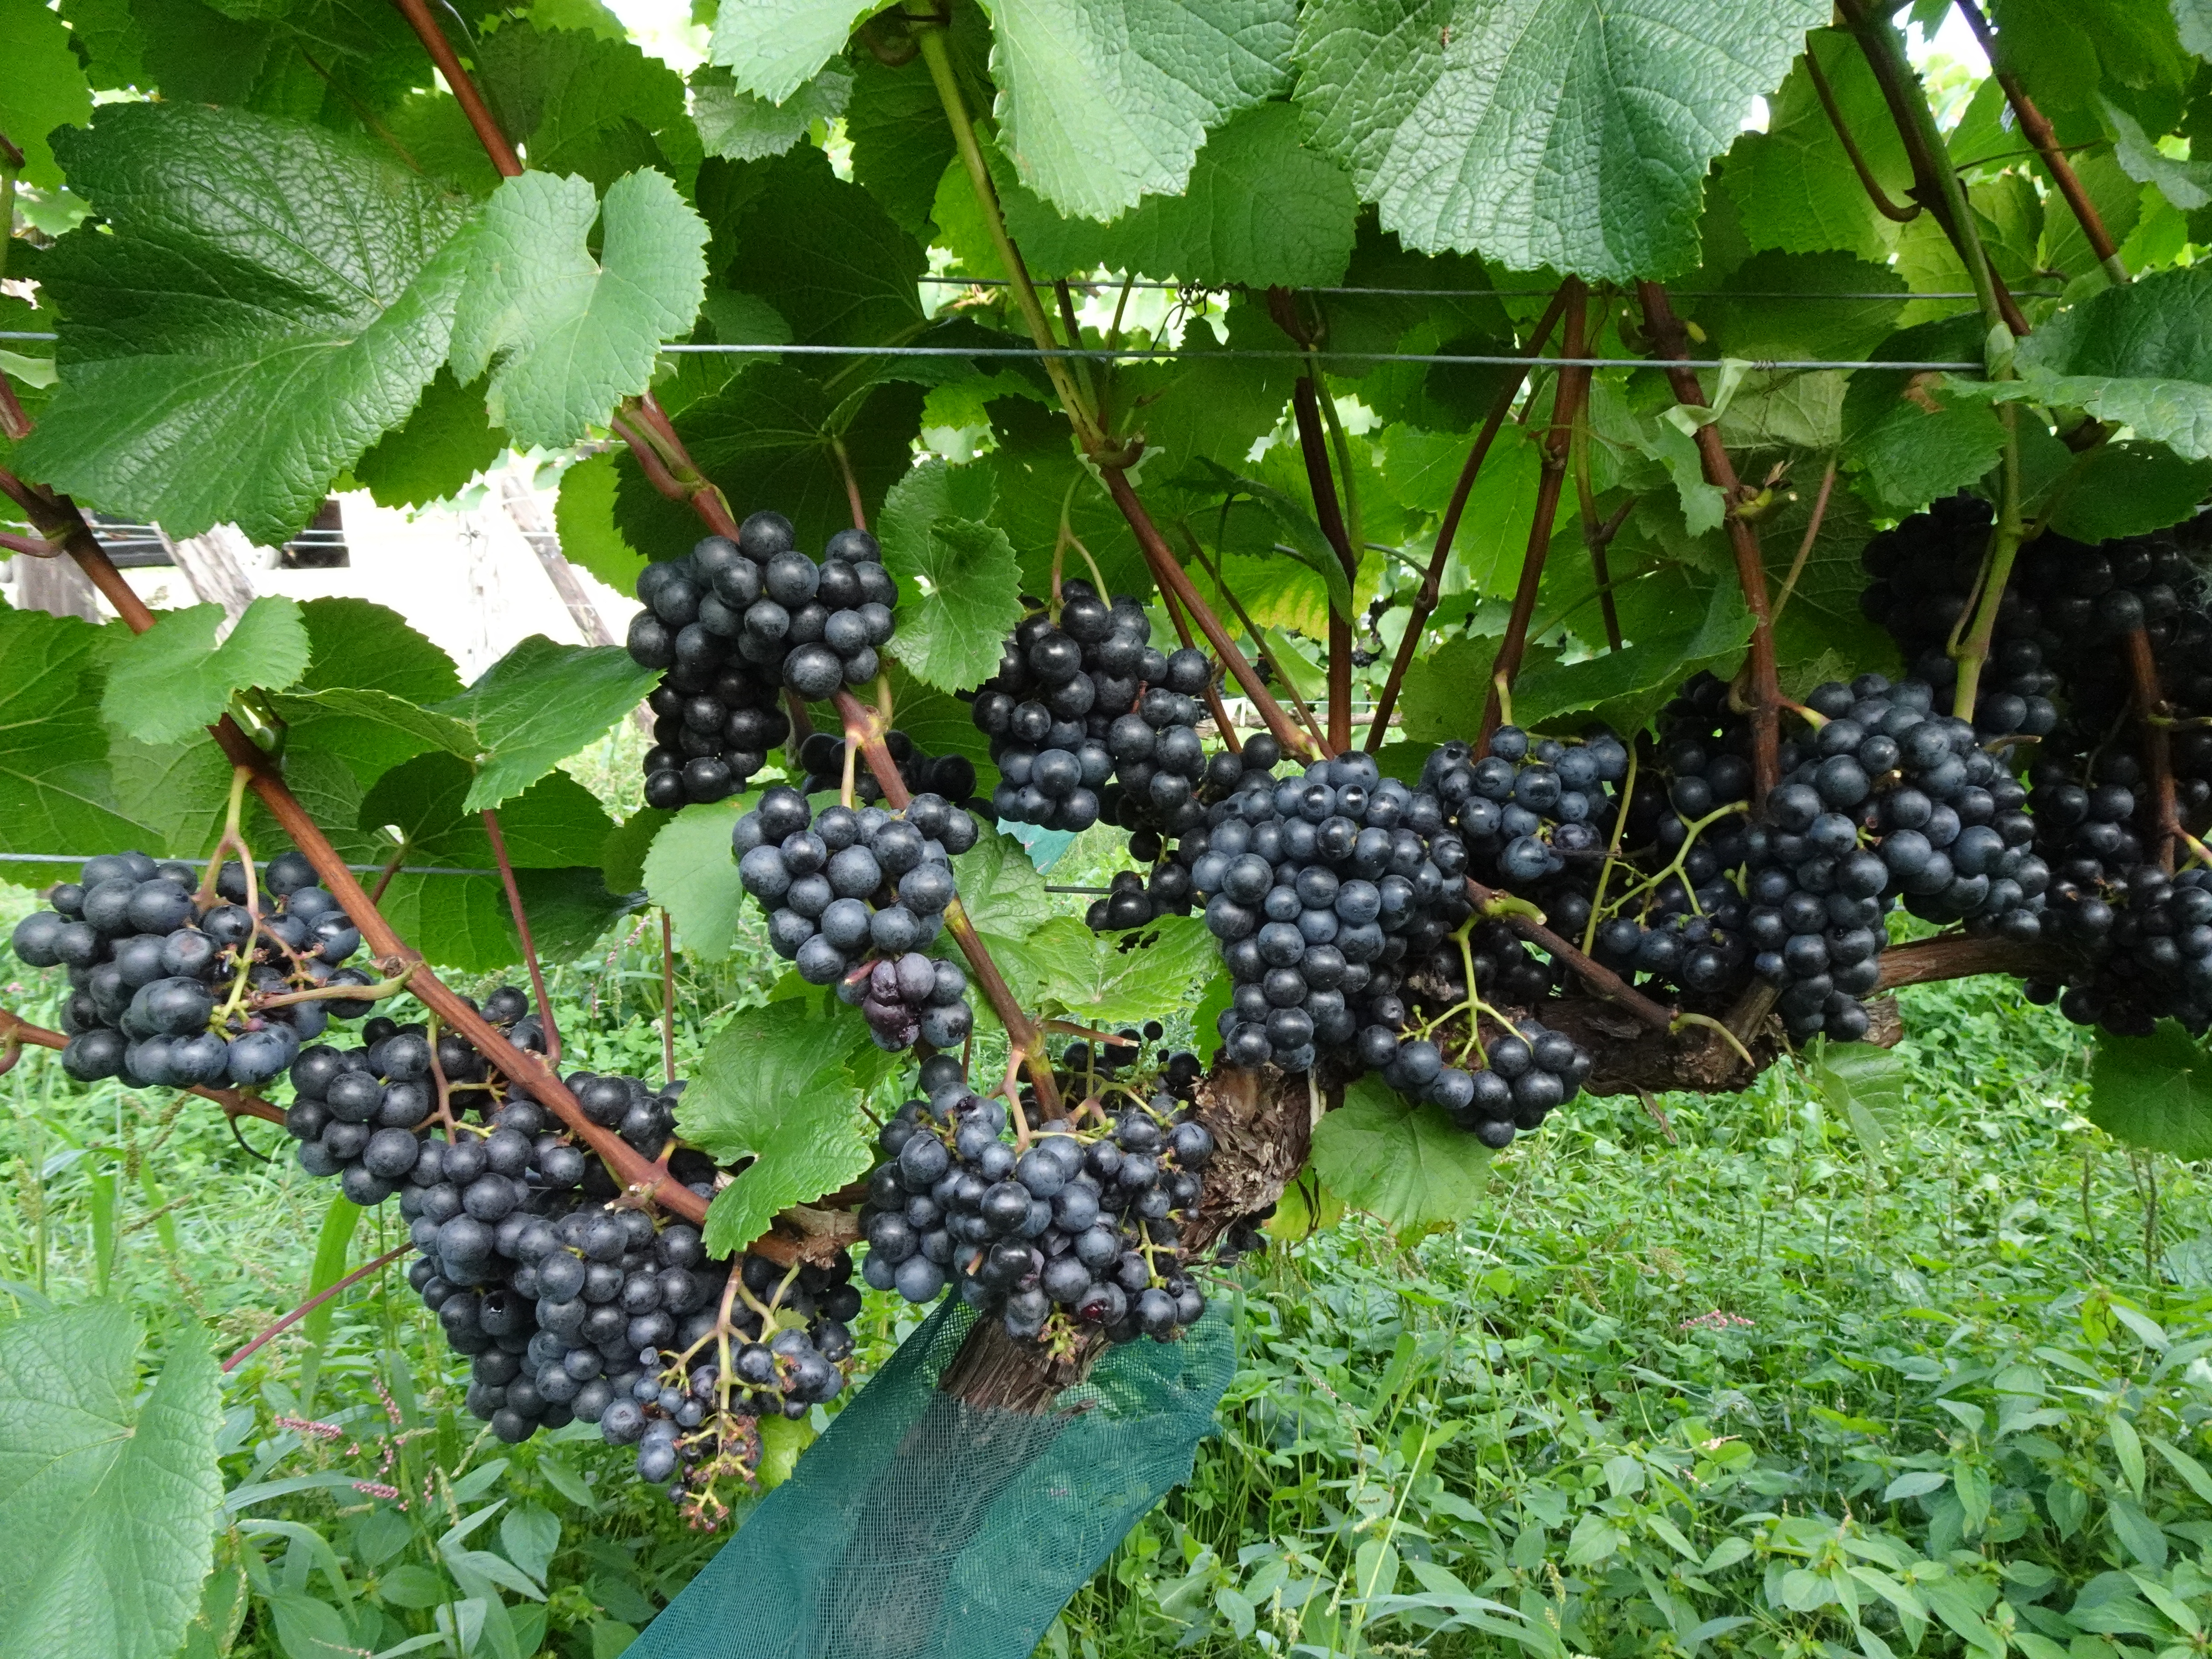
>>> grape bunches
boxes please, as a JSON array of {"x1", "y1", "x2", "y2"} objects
[
  {"x1": 1429, "y1": 899, "x2": 1551, "y2": 1000},
  {"x1": 1778, "y1": 672, "x2": 2049, "y2": 938},
  {"x1": 945, "y1": 1119, "x2": 1129, "y2": 1346},
  {"x1": 862, "y1": 1054, "x2": 1007, "y2": 1299},
  {"x1": 498, "y1": 1188, "x2": 702, "y2": 1425},
  {"x1": 701, "y1": 1210, "x2": 857, "y2": 1359},
  {"x1": 1212, "y1": 1196, "x2": 1277, "y2": 1272},
  {"x1": 1189, "y1": 751, "x2": 1469, "y2": 1075},
  {"x1": 1423, "y1": 727, "x2": 1628, "y2": 880},
  {"x1": 1545, "y1": 742, "x2": 1757, "y2": 993},
  {"x1": 284, "y1": 985, "x2": 577, "y2": 1445},
  {"x1": 562, "y1": 1071, "x2": 757, "y2": 1203},
  {"x1": 2008, "y1": 715, "x2": 2156, "y2": 1035},
  {"x1": 1730, "y1": 784, "x2": 1890, "y2": 1042},
  {"x1": 1083, "y1": 1096, "x2": 1213, "y2": 1344},
  {"x1": 955, "y1": 576, "x2": 1151, "y2": 833},
  {"x1": 1111, "y1": 649, "x2": 1214, "y2": 812},
  {"x1": 1012, "y1": 1021, "x2": 1203, "y2": 1132},
  {"x1": 627, "y1": 511, "x2": 900, "y2": 813},
  {"x1": 1053, "y1": 732, "x2": 1281, "y2": 946},
  {"x1": 732, "y1": 788, "x2": 979, "y2": 1053},
  {"x1": 1861, "y1": 489, "x2": 2212, "y2": 862},
  {"x1": 11, "y1": 850, "x2": 374, "y2": 1089},
  {"x1": 798, "y1": 729, "x2": 999, "y2": 827},
  {"x1": 603, "y1": 1333, "x2": 844, "y2": 1509},
  {"x1": 2076, "y1": 868, "x2": 2212, "y2": 1023},
  {"x1": 1629, "y1": 662, "x2": 1761, "y2": 763},
  {"x1": 1355, "y1": 990, "x2": 1591, "y2": 1150}
]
